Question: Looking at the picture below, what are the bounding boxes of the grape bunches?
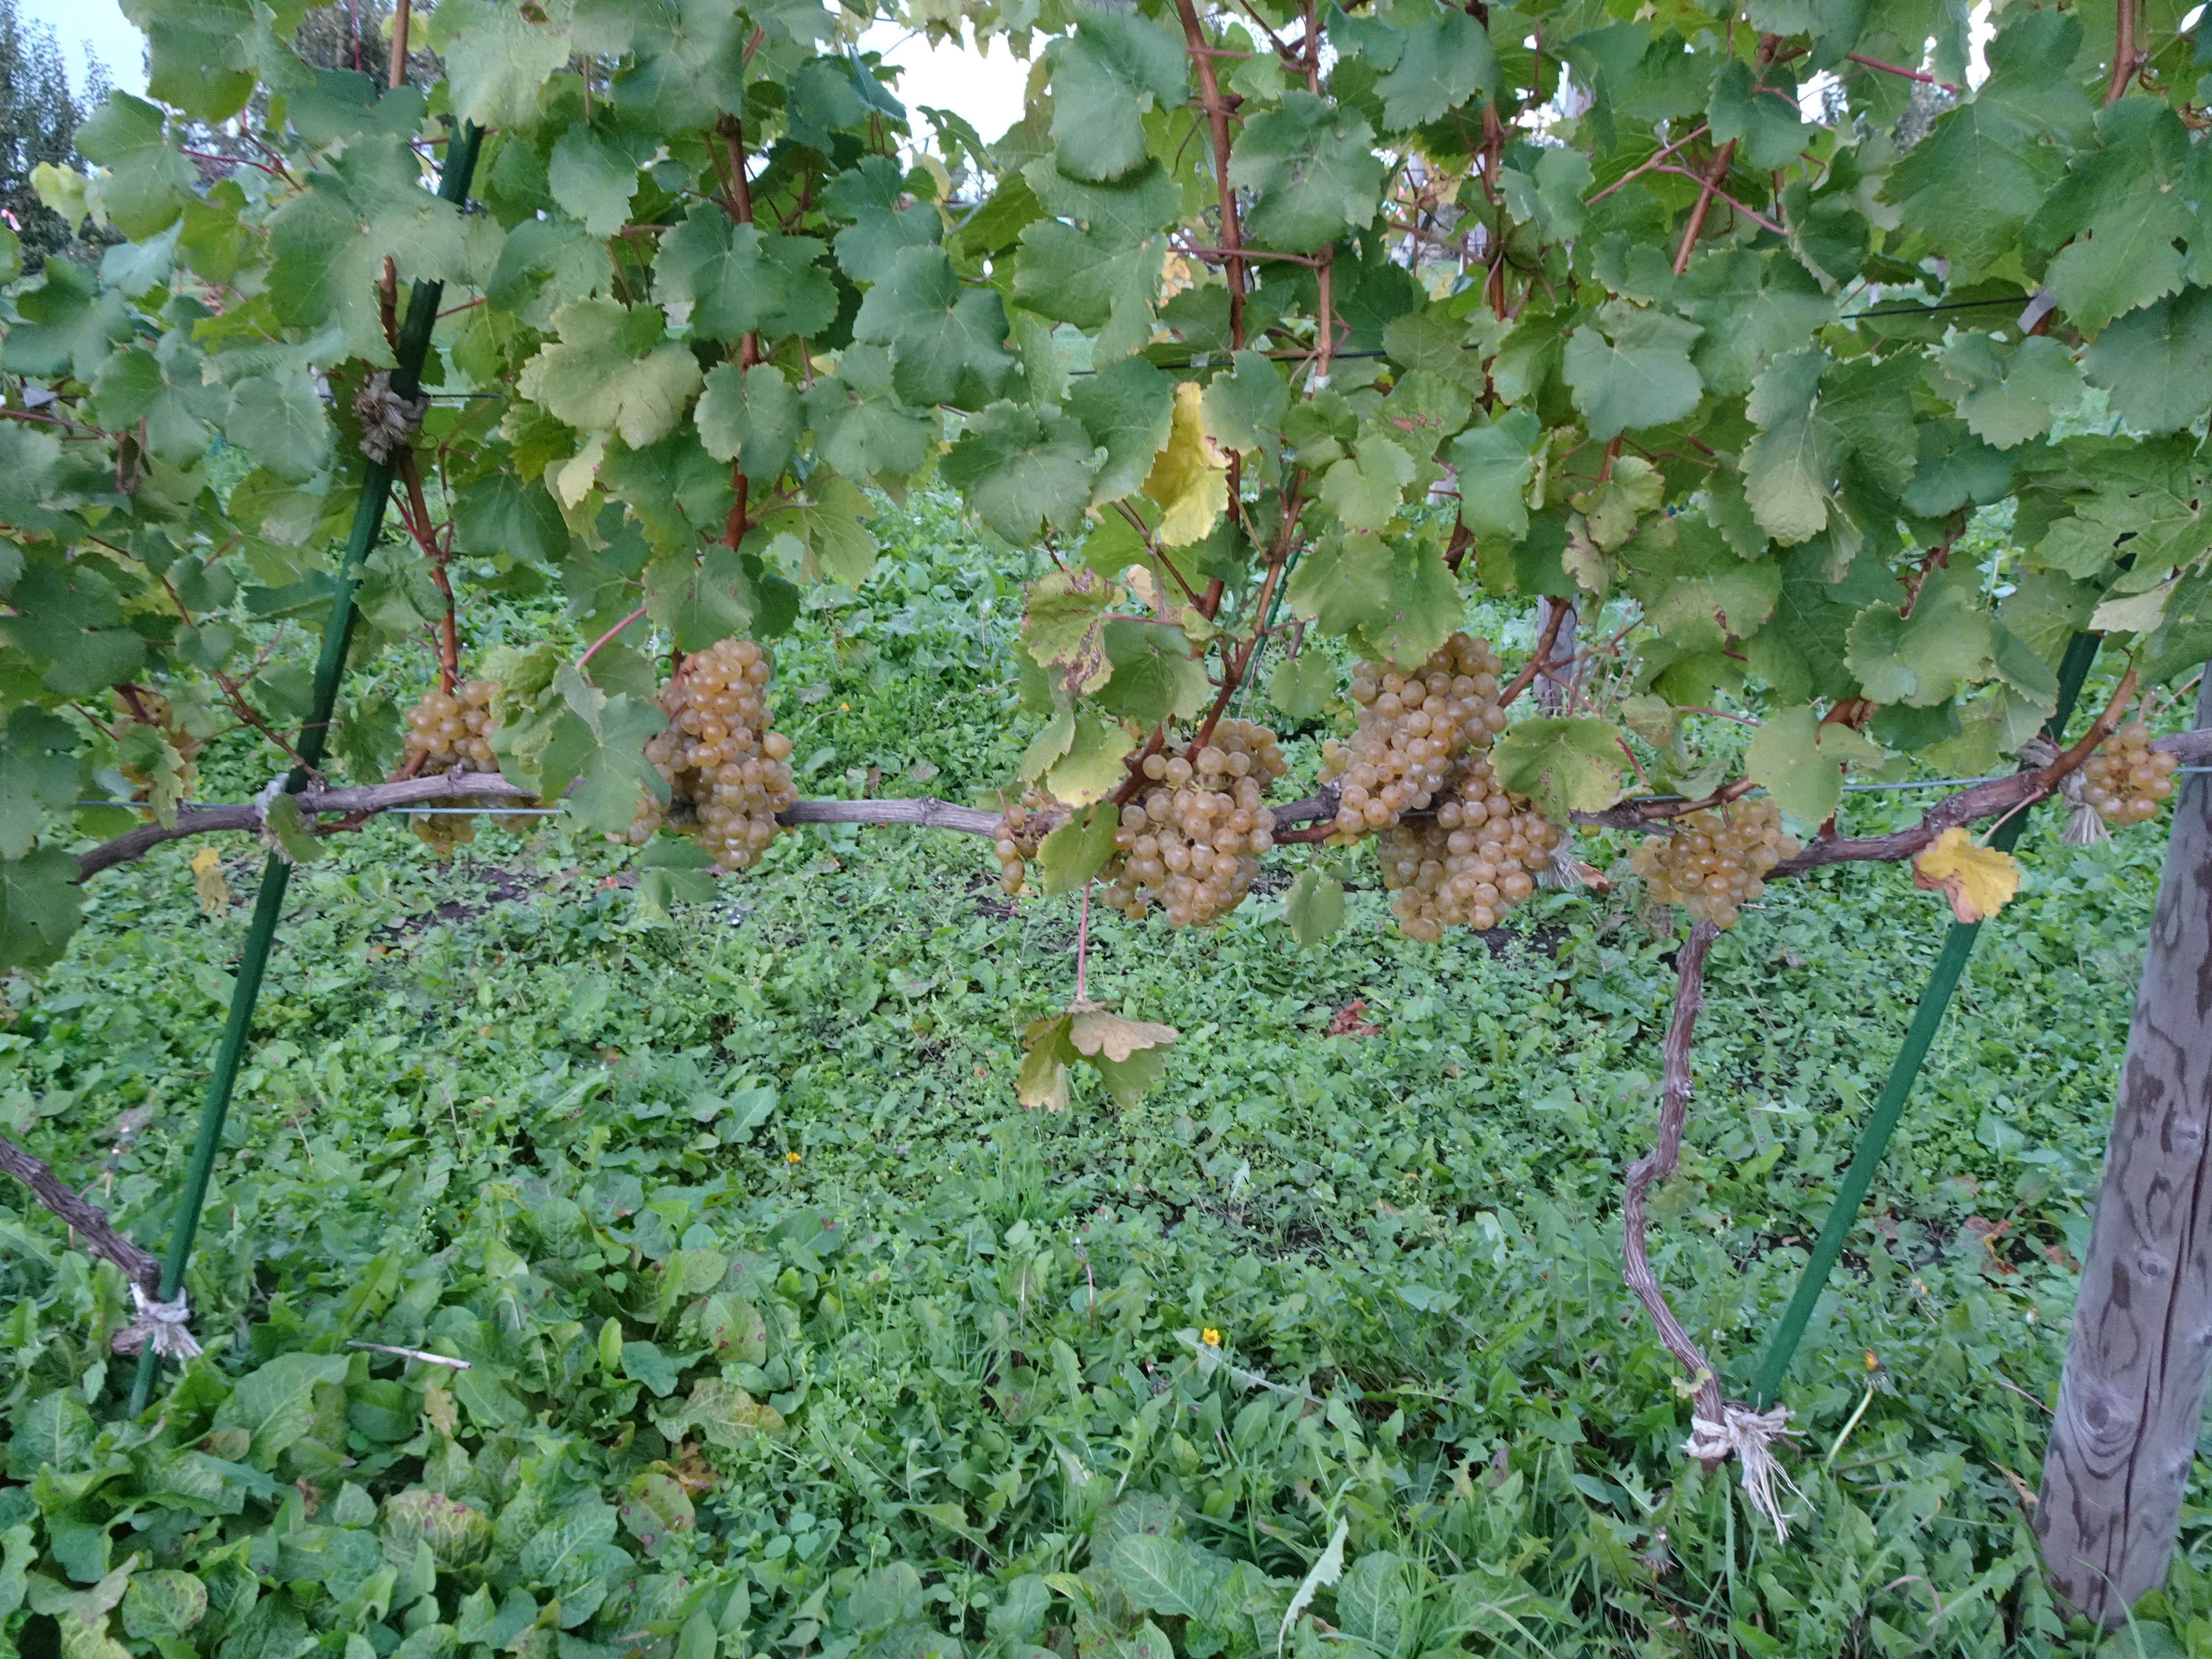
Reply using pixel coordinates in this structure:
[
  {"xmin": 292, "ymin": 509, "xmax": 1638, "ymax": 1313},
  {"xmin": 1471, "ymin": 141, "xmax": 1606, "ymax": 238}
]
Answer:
[
  {"xmin": 679, "ymin": 636, "xmax": 798, "ymax": 871},
  {"xmin": 108, "ymin": 682, "xmax": 204, "ymax": 825},
  {"xmin": 1122, "ymin": 717, "xmax": 1145, "ymax": 760},
  {"xmin": 1194, "ymin": 717, "xmax": 1287, "ymax": 788},
  {"xmin": 655, "ymin": 674, "xmax": 708, "ymax": 835},
  {"xmin": 454, "ymin": 680, "xmax": 557, "ymax": 835},
  {"xmin": 2083, "ymin": 721, "xmax": 2176, "ymax": 828},
  {"xmin": 1318, "ymin": 692, "xmax": 1457, "ymax": 849},
  {"xmin": 1374, "ymin": 819, "xmax": 1453, "ymax": 942},
  {"xmin": 992, "ymin": 786, "xmax": 1041, "ymax": 894},
  {"xmin": 1097, "ymin": 848, "xmax": 1147, "ymax": 920},
  {"xmin": 1630, "ymin": 795, "xmax": 1801, "ymax": 931},
  {"xmin": 1435, "ymin": 758, "xmax": 1559, "ymax": 929},
  {"xmin": 604, "ymin": 696, "xmax": 689, "ymax": 846},
  {"xmin": 1111, "ymin": 746, "xmax": 1276, "ymax": 929},
  {"xmin": 1349, "ymin": 630, "xmax": 1507, "ymax": 775},
  {"xmin": 386, "ymin": 690, "xmax": 480, "ymax": 858}
]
